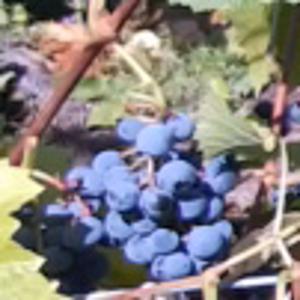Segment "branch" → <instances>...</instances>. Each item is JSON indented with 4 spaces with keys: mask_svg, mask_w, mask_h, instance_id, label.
<instances>
[{
    "mask_svg": "<svg viewBox=\"0 0 300 300\" xmlns=\"http://www.w3.org/2000/svg\"><path fill=\"white\" fill-rule=\"evenodd\" d=\"M139 3L140 0H120L107 23L80 53L66 72L65 77L61 79L56 90L48 97L37 117L33 119L14 143L10 151L12 164L19 165L22 163L23 156L30 144L47 127L59 106L67 99L70 91L75 87L78 79L87 70L90 63L103 47H106L112 41L114 35L121 32L124 23L127 22Z\"/></svg>",
    "mask_w": 300,
    "mask_h": 300,
    "instance_id": "obj_1",
    "label": "branch"
}]
</instances>
